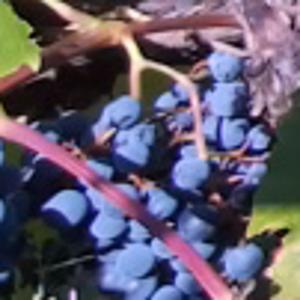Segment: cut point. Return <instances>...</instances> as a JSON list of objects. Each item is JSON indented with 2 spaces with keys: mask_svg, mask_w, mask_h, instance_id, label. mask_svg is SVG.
Returning a JSON list of instances; mask_svg holds the SVG:
<instances>
[{
  "mask_svg": "<svg viewBox=\"0 0 300 300\" xmlns=\"http://www.w3.org/2000/svg\"><path fill=\"white\" fill-rule=\"evenodd\" d=\"M125 51L129 58V92L133 96H138L141 93V69H150L153 72L164 74L175 82L182 84L190 102V110L192 111L196 152L200 157H206L208 150L205 147L206 139L203 126L202 100L197 92L194 81L171 64L158 61L154 58H144L134 40H128L125 43Z\"/></svg>",
  "mask_w": 300,
  "mask_h": 300,
  "instance_id": "1",
  "label": "cut point"
}]
</instances>
